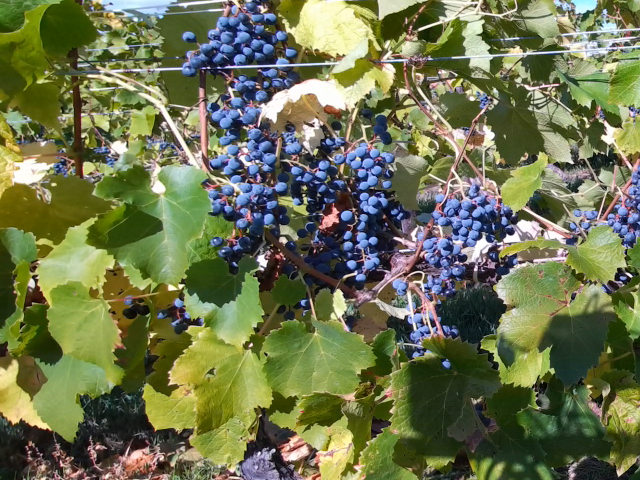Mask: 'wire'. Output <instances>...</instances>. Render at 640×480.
<instances>
[{"mask_svg":"<svg viewBox=\"0 0 640 480\" xmlns=\"http://www.w3.org/2000/svg\"><path fill=\"white\" fill-rule=\"evenodd\" d=\"M638 44H632L630 46H613L601 49H563V50H548L539 52H514V53H496L486 55H447V56H422V57H386L376 58L375 64L388 63V62H424V61H449V60H488L498 58H516V57H541L550 55H565V54H603L615 51H632L638 49Z\"/></svg>","mask_w":640,"mask_h":480,"instance_id":"d2f4af69","label":"wire"},{"mask_svg":"<svg viewBox=\"0 0 640 480\" xmlns=\"http://www.w3.org/2000/svg\"><path fill=\"white\" fill-rule=\"evenodd\" d=\"M338 60H326L304 63H272V64H231V65H201L200 70H234V69H274V68H306L328 65H338Z\"/></svg>","mask_w":640,"mask_h":480,"instance_id":"a73af890","label":"wire"},{"mask_svg":"<svg viewBox=\"0 0 640 480\" xmlns=\"http://www.w3.org/2000/svg\"><path fill=\"white\" fill-rule=\"evenodd\" d=\"M180 66L166 67H120L112 69H74L70 71L71 75L76 74H114L122 72H169L180 71Z\"/></svg>","mask_w":640,"mask_h":480,"instance_id":"4f2155b8","label":"wire"}]
</instances>
